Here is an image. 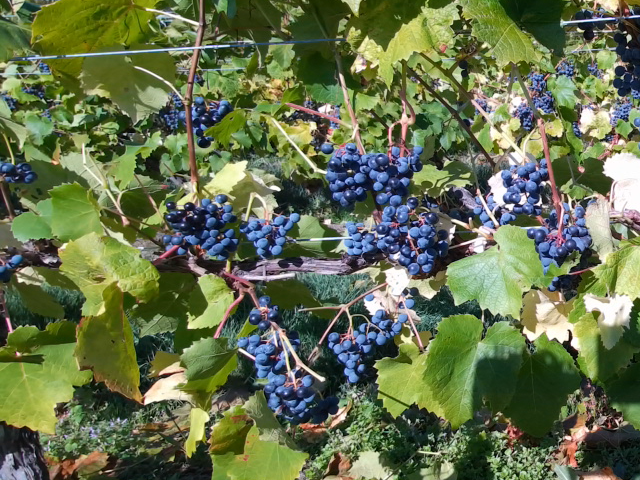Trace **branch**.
<instances>
[{"mask_svg": "<svg viewBox=\"0 0 640 480\" xmlns=\"http://www.w3.org/2000/svg\"><path fill=\"white\" fill-rule=\"evenodd\" d=\"M514 73L522 88L524 99L527 105L529 106V109L536 121V128L540 132V148L545 159V167L547 171V182L552 190L553 199H554L553 205L557 209L558 221H561V197H560L558 185L554 180V169L552 165V157L549 152V148L547 146V129L545 128L544 121L536 107V104L532 99L529 86L526 82V79L522 73L521 68L519 66H516L514 68Z\"/></svg>", "mask_w": 640, "mask_h": 480, "instance_id": "branch-2", "label": "branch"}, {"mask_svg": "<svg viewBox=\"0 0 640 480\" xmlns=\"http://www.w3.org/2000/svg\"><path fill=\"white\" fill-rule=\"evenodd\" d=\"M406 72L411 74L413 78H415L416 80H418V82L421 84V86L430 94H432L433 96H435L440 102H442V104L444 105V107L448 110V112L452 115V117L460 124L463 126L466 134L470 137V139L481 149L482 154L484 155V157L486 158V160L488 161L489 165L491 167H495L496 163L493 161V158L490 156V154L488 153V151L486 150V147L484 146V144L475 136V134L470 130L469 125L467 124V122L465 120H463L453 109V107L451 105H449L448 101L439 93L437 92L435 89H432L430 86H428V84L425 82V80L422 78L421 75L417 74L413 69L407 67V60L403 59L402 60V68H401V85H400V98H401V117H400V127H401V132H400V153L399 156L400 157H404L405 156V146H406V132H407V128H408V123H409V114L406 113V95H405V88H406Z\"/></svg>", "mask_w": 640, "mask_h": 480, "instance_id": "branch-1", "label": "branch"}, {"mask_svg": "<svg viewBox=\"0 0 640 480\" xmlns=\"http://www.w3.org/2000/svg\"><path fill=\"white\" fill-rule=\"evenodd\" d=\"M200 60V51H193V57L189 66V76L187 79V88L186 95L184 99V123L186 127V140H187V154H188V162L190 168V183L194 185L196 182L197 191H200L199 179L197 174V166L195 160V152H194V137H193V125L191 122L192 119V94L194 91V81L196 79V69L197 64Z\"/></svg>", "mask_w": 640, "mask_h": 480, "instance_id": "branch-3", "label": "branch"}, {"mask_svg": "<svg viewBox=\"0 0 640 480\" xmlns=\"http://www.w3.org/2000/svg\"><path fill=\"white\" fill-rule=\"evenodd\" d=\"M384 285H388V282H382L380 283V285L376 286L375 288L371 289V290H367L365 292H362L357 298H355L354 300H352L351 302L345 304L342 308H340V310L336 313V315L329 321L324 334L322 335V337L319 340V344H322V342L324 341V339L326 338L330 327L332 326V324L335 322L336 319H338V317L343 313V311L350 307L351 305H354L357 301L361 300L365 295L369 294V293H374L375 291L379 290L380 288H382Z\"/></svg>", "mask_w": 640, "mask_h": 480, "instance_id": "branch-6", "label": "branch"}, {"mask_svg": "<svg viewBox=\"0 0 640 480\" xmlns=\"http://www.w3.org/2000/svg\"><path fill=\"white\" fill-rule=\"evenodd\" d=\"M336 57V70L337 73L339 74V79H340V83L342 86V91H343V95H344V101L347 103L348 106V110H349V114H350V118L352 119V125H353V129L355 132V145L356 148L359 150L361 155L365 154V149L363 146V142L362 139L360 138L362 131L359 129V124L357 122V117L355 116V111H354V107L351 101V96L348 93V88H347V84H346V80H345V76H344V72L341 68V54L340 53H336L335 54Z\"/></svg>", "mask_w": 640, "mask_h": 480, "instance_id": "branch-4", "label": "branch"}, {"mask_svg": "<svg viewBox=\"0 0 640 480\" xmlns=\"http://www.w3.org/2000/svg\"><path fill=\"white\" fill-rule=\"evenodd\" d=\"M198 32L194 39L195 45H201L203 37L205 35L206 21H205V4L200 2L198 4Z\"/></svg>", "mask_w": 640, "mask_h": 480, "instance_id": "branch-7", "label": "branch"}, {"mask_svg": "<svg viewBox=\"0 0 640 480\" xmlns=\"http://www.w3.org/2000/svg\"><path fill=\"white\" fill-rule=\"evenodd\" d=\"M270 324H272L276 330L280 333V335L284 338L285 343L288 345V348L290 350L291 355L295 358V362L298 366V368H303L304 370H306L308 373L312 374L313 378H317L321 383H325V377L322 375H319L318 373H316L315 371L309 369L306 365H304V362L297 356V354H295L291 343L289 342L288 338H287V333L285 328H280L274 321H270Z\"/></svg>", "mask_w": 640, "mask_h": 480, "instance_id": "branch-5", "label": "branch"}, {"mask_svg": "<svg viewBox=\"0 0 640 480\" xmlns=\"http://www.w3.org/2000/svg\"><path fill=\"white\" fill-rule=\"evenodd\" d=\"M234 288L236 290H239L241 295H245V292H248V294H250V297L252 298L253 302L255 303L257 308H260L259 302L257 301V293L255 291V289H250L248 287H243L241 285L240 282H233Z\"/></svg>", "mask_w": 640, "mask_h": 480, "instance_id": "branch-8", "label": "branch"}]
</instances>
